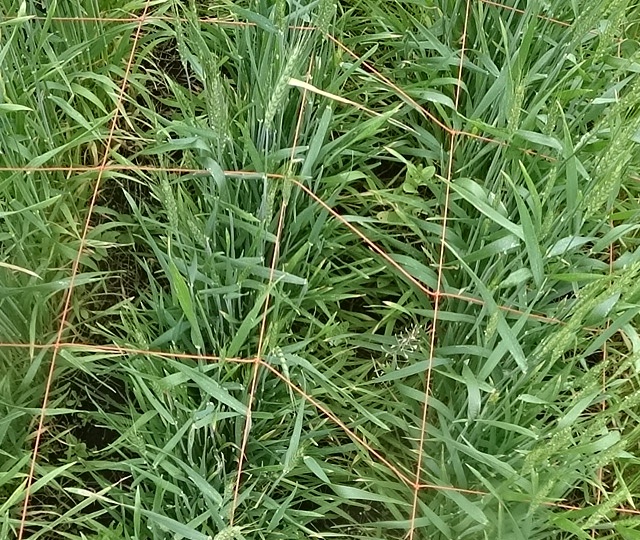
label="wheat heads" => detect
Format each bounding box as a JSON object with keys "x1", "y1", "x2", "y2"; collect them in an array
[
  {"x1": 134, "y1": 329, "x2": 149, "y2": 349},
  {"x1": 318, "y1": 0, "x2": 334, "y2": 32},
  {"x1": 208, "y1": 71, "x2": 231, "y2": 146},
  {"x1": 614, "y1": 394, "x2": 640, "y2": 411},
  {"x1": 282, "y1": 173, "x2": 292, "y2": 204},
  {"x1": 269, "y1": 322, "x2": 279, "y2": 348},
  {"x1": 549, "y1": 427, "x2": 571, "y2": 443},
  {"x1": 538, "y1": 213, "x2": 553, "y2": 243},
  {"x1": 542, "y1": 168, "x2": 558, "y2": 201},
  {"x1": 580, "y1": 165, "x2": 621, "y2": 221},
  {"x1": 261, "y1": 192, "x2": 274, "y2": 225},
  {"x1": 579, "y1": 267, "x2": 626, "y2": 294},
  {"x1": 567, "y1": 302, "x2": 592, "y2": 332},
  {"x1": 212, "y1": 523, "x2": 241, "y2": 540},
  {"x1": 593, "y1": 0, "x2": 630, "y2": 68},
  {"x1": 132, "y1": 432, "x2": 146, "y2": 453},
  {"x1": 553, "y1": 328, "x2": 579, "y2": 362},
  {"x1": 151, "y1": 380, "x2": 171, "y2": 394},
  {"x1": 171, "y1": 20, "x2": 186, "y2": 54},
  {"x1": 493, "y1": 184, "x2": 505, "y2": 207},
  {"x1": 603, "y1": 88, "x2": 639, "y2": 127},
  {"x1": 190, "y1": 8, "x2": 206, "y2": 55},
  {"x1": 581, "y1": 490, "x2": 627, "y2": 531},
  {"x1": 275, "y1": 0, "x2": 286, "y2": 27},
  {"x1": 267, "y1": 48, "x2": 297, "y2": 118},
  {"x1": 243, "y1": 370, "x2": 251, "y2": 392},
  {"x1": 517, "y1": 444, "x2": 544, "y2": 480},
  {"x1": 219, "y1": 347, "x2": 226, "y2": 370},
  {"x1": 538, "y1": 320, "x2": 575, "y2": 355},
  {"x1": 602, "y1": 122, "x2": 635, "y2": 173},
  {"x1": 254, "y1": 282, "x2": 270, "y2": 308},
  {"x1": 579, "y1": 363, "x2": 606, "y2": 385},
  {"x1": 592, "y1": 440, "x2": 625, "y2": 468},
  {"x1": 277, "y1": 349, "x2": 288, "y2": 381},
  {"x1": 482, "y1": 316, "x2": 497, "y2": 346},
  {"x1": 159, "y1": 178, "x2": 183, "y2": 234},
  {"x1": 568, "y1": 378, "x2": 598, "y2": 401},
  {"x1": 595, "y1": 490, "x2": 627, "y2": 510},
  {"x1": 509, "y1": 84, "x2": 528, "y2": 129},
  {"x1": 583, "y1": 419, "x2": 602, "y2": 443},
  {"x1": 534, "y1": 482, "x2": 553, "y2": 517},
  {"x1": 188, "y1": 223, "x2": 205, "y2": 249},
  {"x1": 237, "y1": 258, "x2": 253, "y2": 281},
  {"x1": 615, "y1": 351, "x2": 637, "y2": 378},
  {"x1": 241, "y1": 124, "x2": 250, "y2": 163},
  {"x1": 573, "y1": 0, "x2": 609, "y2": 45},
  {"x1": 594, "y1": 277, "x2": 633, "y2": 305},
  {"x1": 546, "y1": 94, "x2": 561, "y2": 140},
  {"x1": 283, "y1": 445, "x2": 306, "y2": 474},
  {"x1": 223, "y1": 467, "x2": 236, "y2": 500}
]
